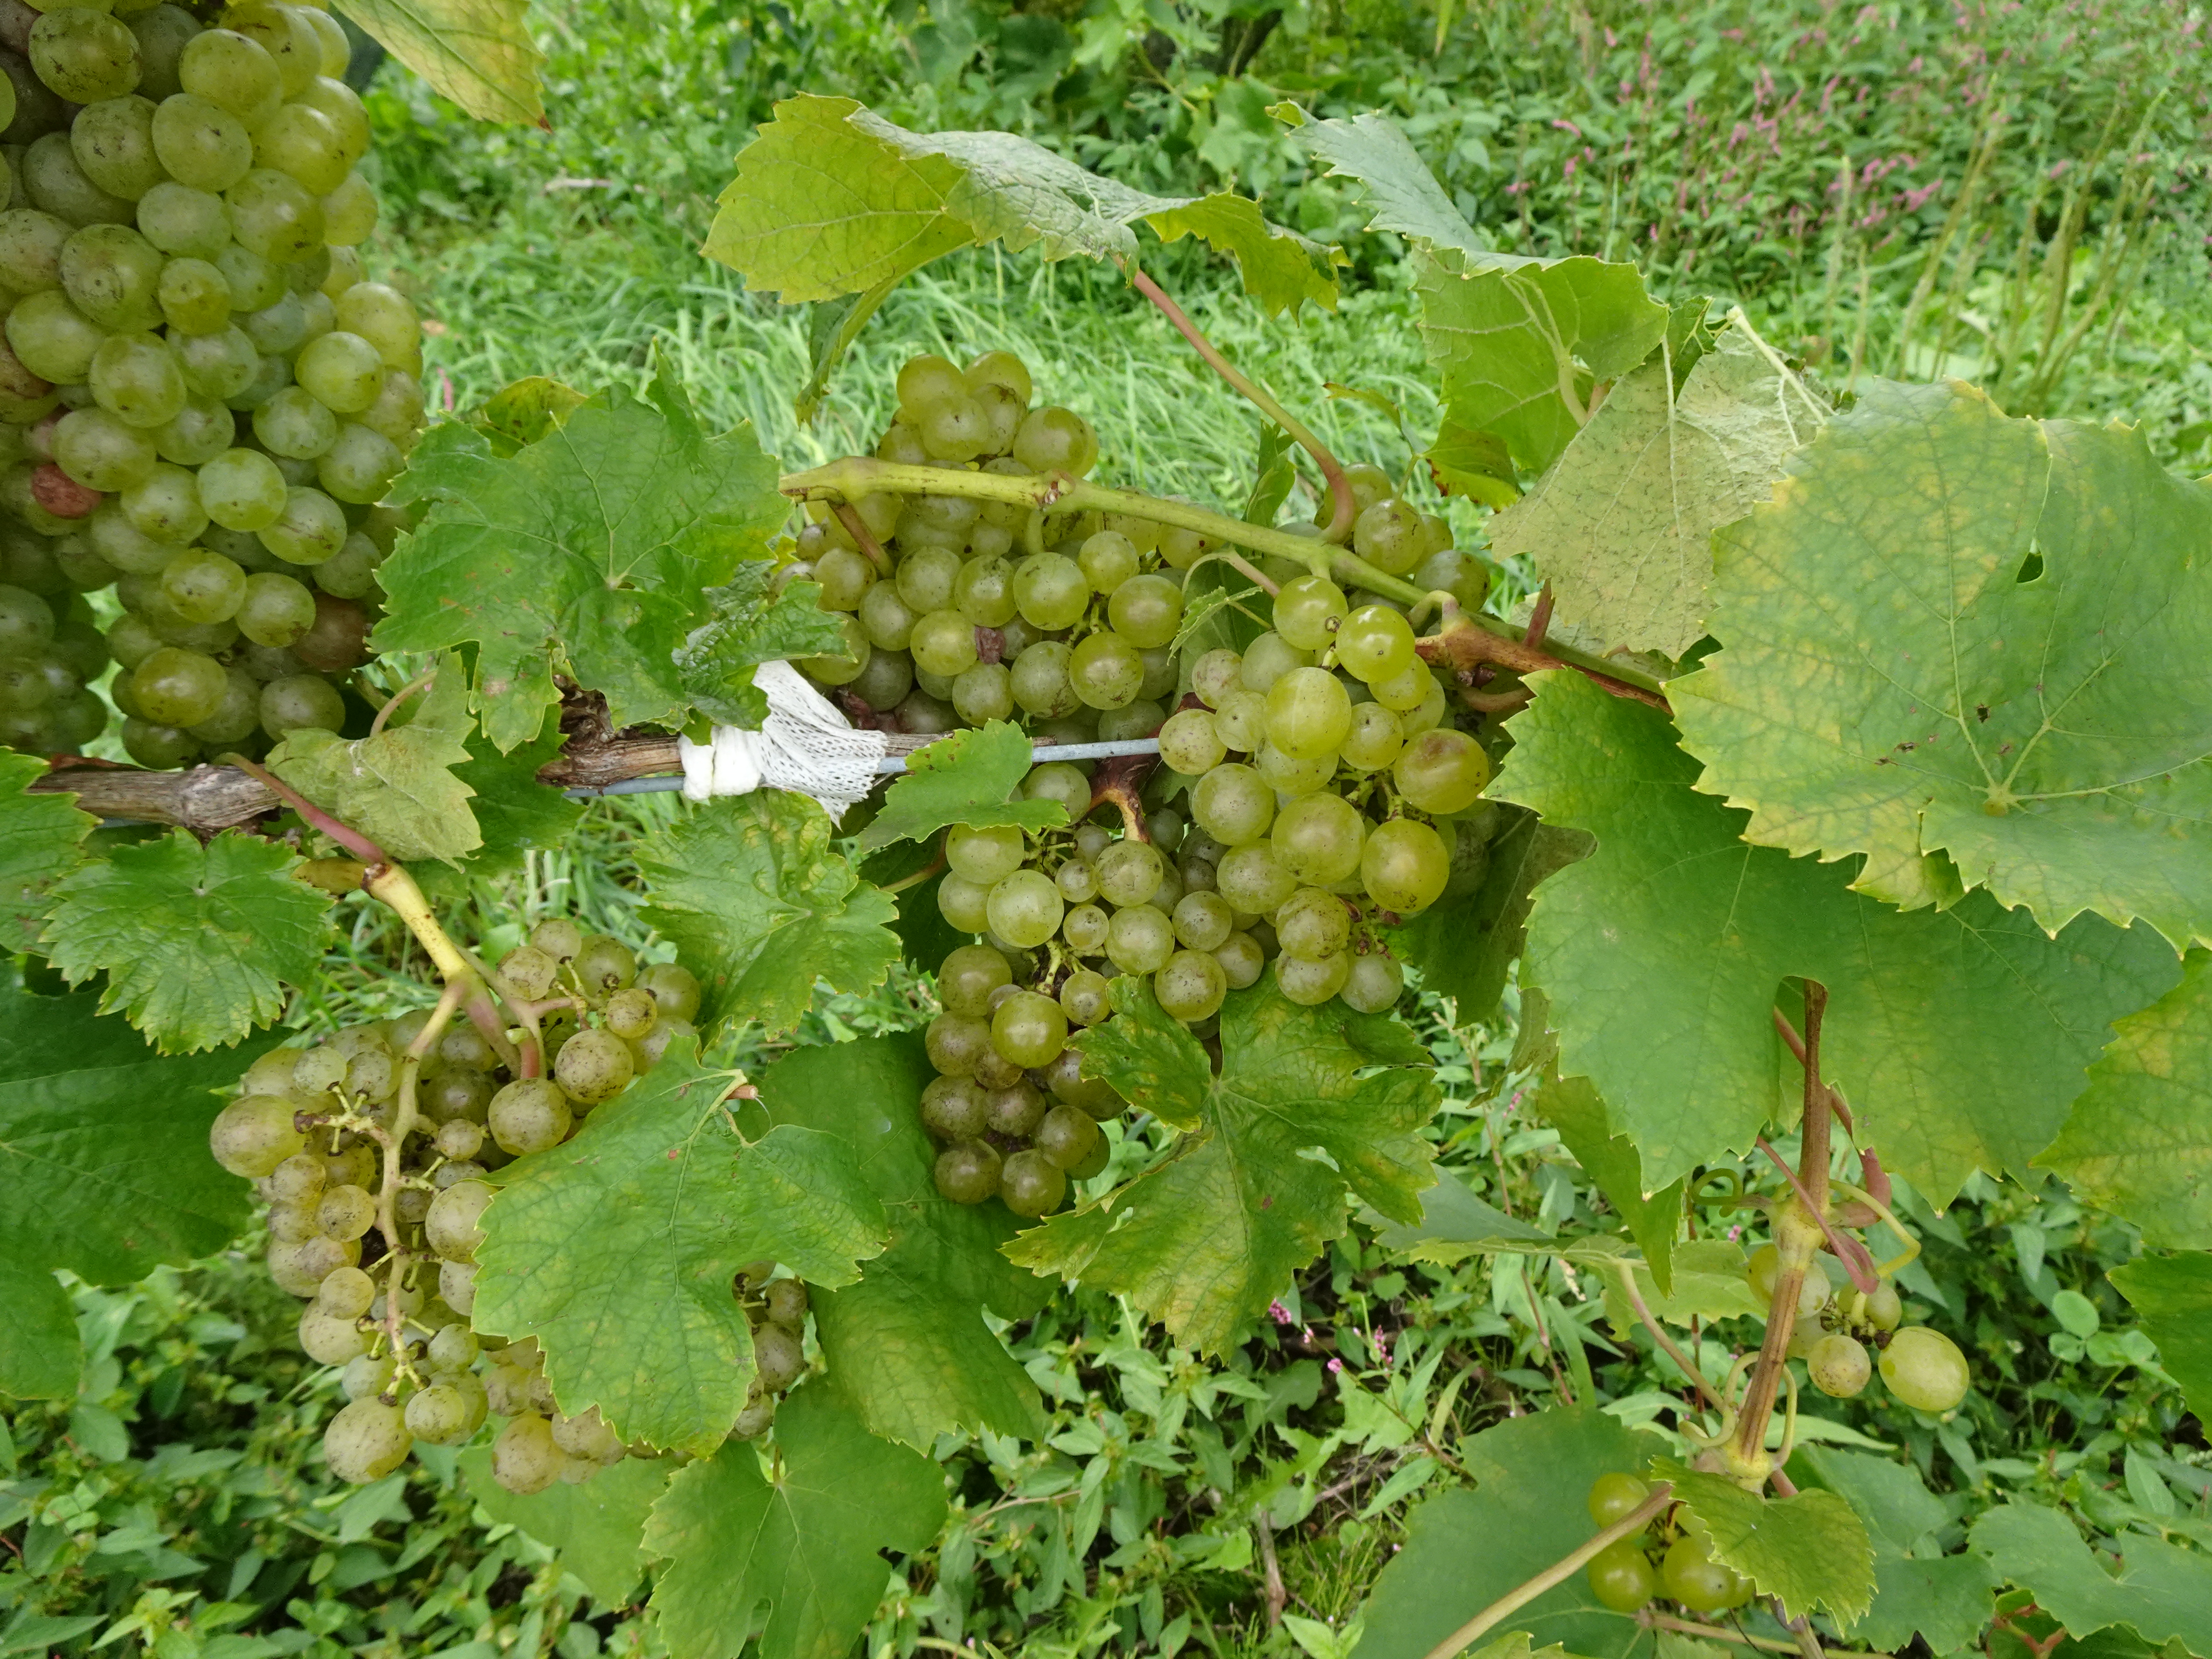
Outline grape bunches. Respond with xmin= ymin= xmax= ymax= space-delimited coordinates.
xmin=0 ymin=514 xmax=113 ymax=761
xmin=1746 ymin=1239 xmax=1971 ymax=1411
xmin=208 ymin=1008 xmax=520 ymax=1483
xmin=0 ymin=0 xmax=428 ymax=769
xmin=1262 ymin=461 xmax=1491 ymax=613
xmin=477 ymin=1334 xmax=696 ymax=1493
xmin=1585 ymin=1471 xmax=1758 ymax=1614
xmin=771 ymin=347 xmax=1235 ymax=780
xmin=728 ymin=1261 xmax=808 ymax=1441
xmin=1158 ymin=573 xmax=1489 ymax=1013
xmin=487 ymin=916 xmax=807 ymax=1156
xmin=919 ymin=761 xmax=1299 ymax=1214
